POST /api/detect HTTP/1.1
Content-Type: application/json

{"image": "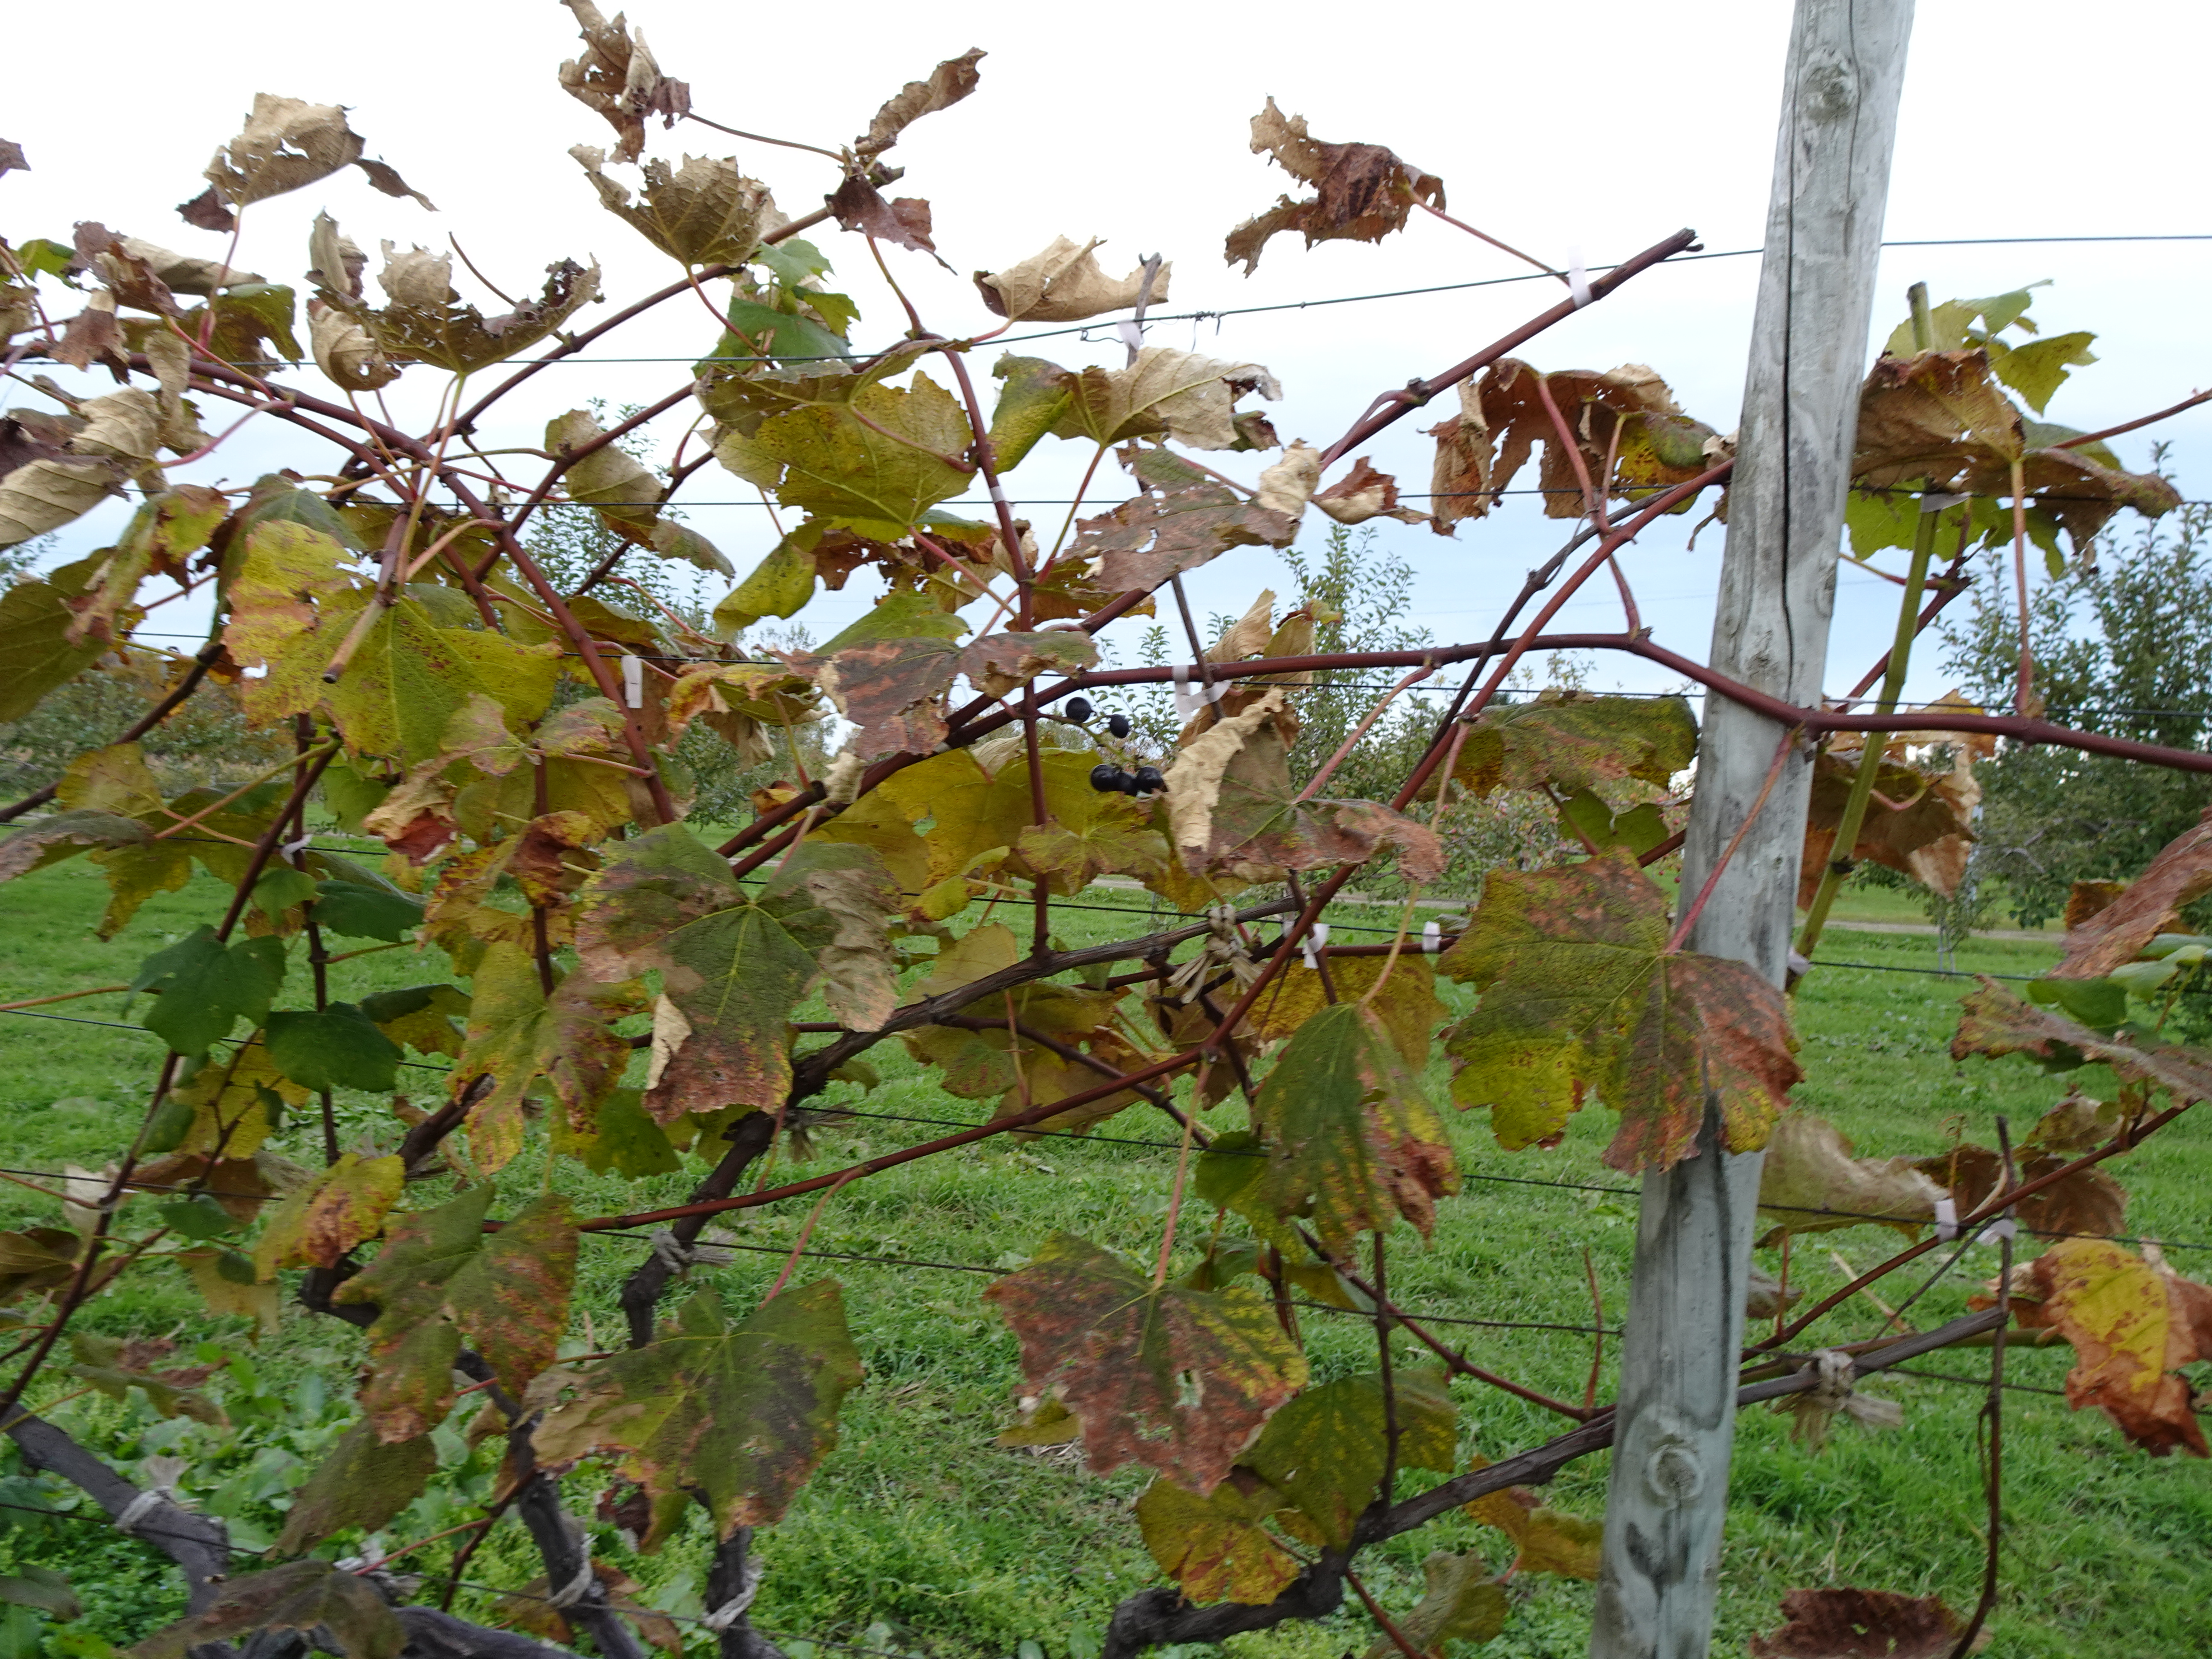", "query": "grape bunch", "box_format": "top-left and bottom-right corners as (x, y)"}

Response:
top-left (1065, 691), bottom-right (1175, 797)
